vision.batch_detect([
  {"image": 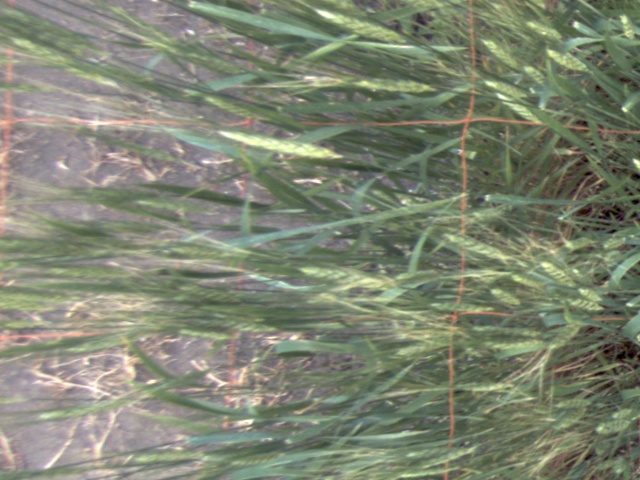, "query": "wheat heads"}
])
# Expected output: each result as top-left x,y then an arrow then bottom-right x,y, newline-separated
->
620,16 -> 634,41
343,75 -> 427,91
495,98 -> 539,124
318,11 -> 399,40
579,289 -> 603,302
111,131 -> 177,163
559,397 -> 595,407
489,342 -> 545,352
176,327 -> 227,344
430,299 -> 487,315
569,297 -> 601,312
488,289 -> 522,307
445,233 -> 506,259
11,34 -> 65,60
132,195 -> 194,211
484,39 -> 515,67
201,94 -> 250,114
65,332 -> 143,356
232,454 -> 279,469
466,383 -> 512,394
0,235 -> 105,254
545,52 -> 592,74
523,66 -> 541,82
305,263 -> 398,290
188,51 -> 248,73
181,283 -> 281,301
484,78 -> 525,95
605,236 -> 625,249
104,218 -> 155,233
424,451 -> 473,469
592,420 -> 632,432
49,265 -> 133,277
402,450 -> 475,458
542,257 -> 572,287
134,451 -> 202,462
566,237 -> 592,247
2,302 -> 52,312
611,407 -> 635,418
525,18 -> 560,36
35,406 -> 132,422
66,68 -> 118,90
5,321 -> 47,330
514,273 -> 542,291
0,288 -> 73,302
392,341 -> 445,357
218,131 -> 343,160
551,324 -> 580,348
167,245 -> 226,259
216,317 -> 274,333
